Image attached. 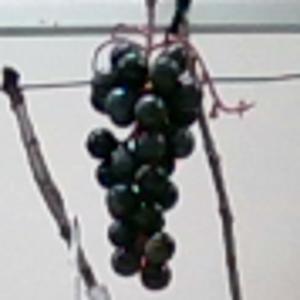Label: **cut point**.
Instances as JSON below:
<instances>
[{"instance_id":"6a23745f","label":"cut point","mask_w":300,"mask_h":300,"mask_svg":"<svg viewBox=\"0 0 300 300\" xmlns=\"http://www.w3.org/2000/svg\"><path fill=\"white\" fill-rule=\"evenodd\" d=\"M160 0H144V4L147 8L148 15V48L144 51L143 56L147 61L151 60L152 54L155 50V12L156 4Z\"/></svg>"}]
</instances>
